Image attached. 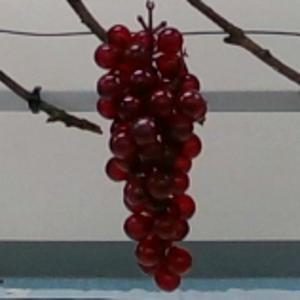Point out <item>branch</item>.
<instances>
[{
  "label": "branch",
  "instance_id": "obj_1",
  "mask_svg": "<svg viewBox=\"0 0 300 300\" xmlns=\"http://www.w3.org/2000/svg\"><path fill=\"white\" fill-rule=\"evenodd\" d=\"M185 1L191 8L219 27L224 34H228L221 39L223 44L230 47H239L249 52L272 71L284 76L290 82L300 87V72L282 62L269 48H263L248 37L241 27L236 26L235 23L227 20L204 0Z\"/></svg>",
  "mask_w": 300,
  "mask_h": 300
},
{
  "label": "branch",
  "instance_id": "obj_2",
  "mask_svg": "<svg viewBox=\"0 0 300 300\" xmlns=\"http://www.w3.org/2000/svg\"><path fill=\"white\" fill-rule=\"evenodd\" d=\"M0 82L13 94L26 102L28 110L32 115H39L42 112L47 115L45 124H55L60 122L64 124L65 128H76L96 136H103L105 134L102 126L91 122L86 118H80L68 113L65 109L60 108L41 97L43 92L41 85H35L31 91L27 90L16 80L8 76L2 69H0Z\"/></svg>",
  "mask_w": 300,
  "mask_h": 300
},
{
  "label": "branch",
  "instance_id": "obj_3",
  "mask_svg": "<svg viewBox=\"0 0 300 300\" xmlns=\"http://www.w3.org/2000/svg\"><path fill=\"white\" fill-rule=\"evenodd\" d=\"M75 16L80 20V23L93 34L102 44L106 43L105 34L108 29L104 28L101 23L90 12L88 6L83 0H64Z\"/></svg>",
  "mask_w": 300,
  "mask_h": 300
},
{
  "label": "branch",
  "instance_id": "obj_4",
  "mask_svg": "<svg viewBox=\"0 0 300 300\" xmlns=\"http://www.w3.org/2000/svg\"><path fill=\"white\" fill-rule=\"evenodd\" d=\"M207 120H208V117H206V115H205L204 118H202L201 120L197 121L196 123H197L199 126H201V128H203L204 125H205V122H206Z\"/></svg>",
  "mask_w": 300,
  "mask_h": 300
}]
</instances>
